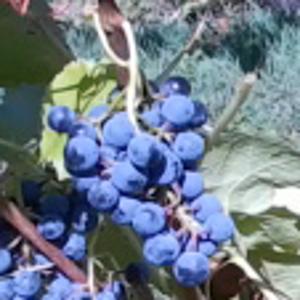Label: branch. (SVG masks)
Returning a JSON list of instances; mask_svg holds the SVG:
<instances>
[{
  "label": "branch",
  "instance_id": "1",
  "mask_svg": "<svg viewBox=\"0 0 300 300\" xmlns=\"http://www.w3.org/2000/svg\"><path fill=\"white\" fill-rule=\"evenodd\" d=\"M0 218L24 240L45 253L66 276L72 277L77 283L87 281L86 271L61 254L52 242H47L34 232L32 219L6 195H0Z\"/></svg>",
  "mask_w": 300,
  "mask_h": 300
},
{
  "label": "branch",
  "instance_id": "2",
  "mask_svg": "<svg viewBox=\"0 0 300 300\" xmlns=\"http://www.w3.org/2000/svg\"><path fill=\"white\" fill-rule=\"evenodd\" d=\"M97 7L108 43L119 60H127L129 49L124 33L125 15L118 5V0H98Z\"/></svg>",
  "mask_w": 300,
  "mask_h": 300
}]
</instances>
